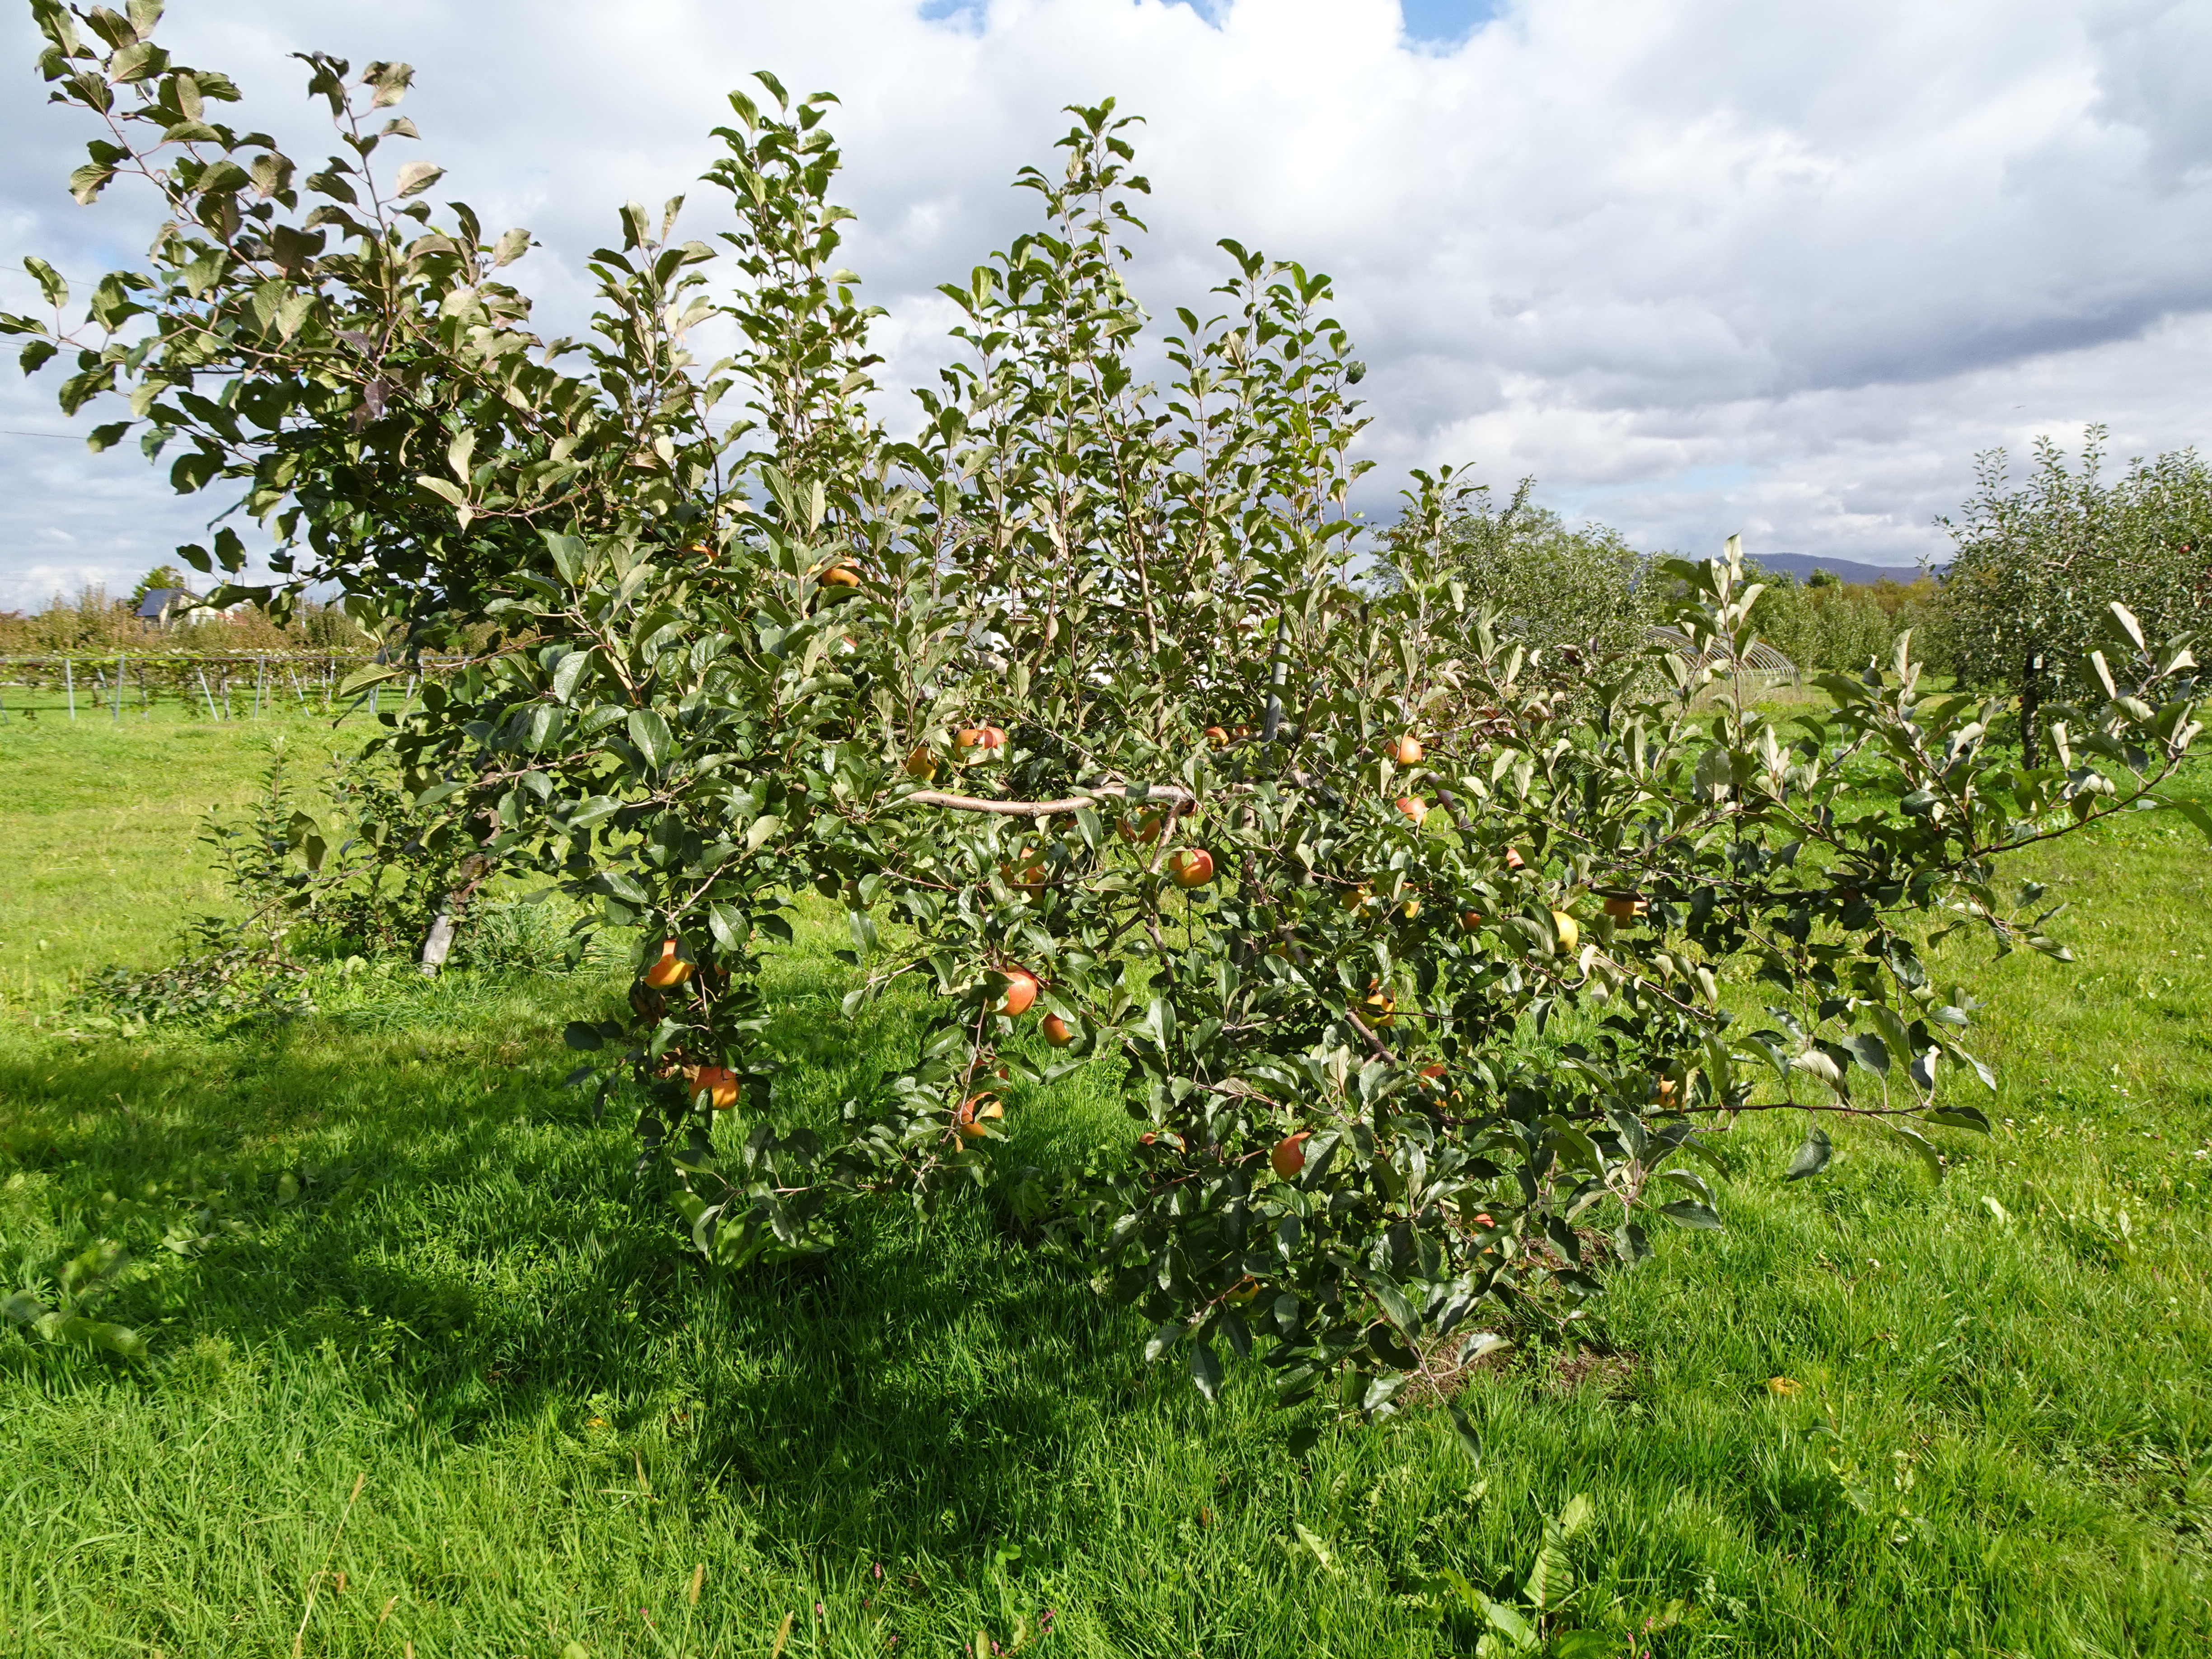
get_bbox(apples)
[1604,890,1648,929]
[1000,846,1045,891]
[1139,1131,1186,1154]
[1363,979,1396,1023]
[1399,882,1420,918]
[1271,1132,1312,1183]
[987,966,1037,1016]
[1656,1080,1678,1108]
[902,746,937,780]
[1506,847,1524,867]
[644,938,693,989]
[983,725,1007,749]
[1471,1213,1495,1253]
[1551,911,1578,953]
[1232,724,1250,739]
[689,1066,739,1111]
[821,556,859,587]
[1042,1012,1072,1047]
[677,544,722,587]
[1065,820,1078,829]
[1203,726,1229,752]
[1161,801,1197,818]
[1116,806,1160,846]
[972,1057,1008,1081]
[1168,849,1213,888]
[959,1092,1003,1135]
[1385,736,1422,765]
[955,726,997,765]
[1419,1063,1447,1088]
[1224,1274,1258,1304]
[1396,797,1427,828]
[1460,911,1481,932]
[1342,879,1376,921]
